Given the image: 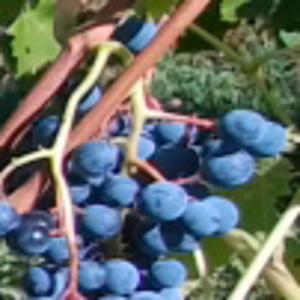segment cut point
<instances>
[{"label":"cut point","mask_w":300,"mask_h":300,"mask_svg":"<svg viewBox=\"0 0 300 300\" xmlns=\"http://www.w3.org/2000/svg\"><path fill=\"white\" fill-rule=\"evenodd\" d=\"M143 86L144 81L142 79H137L128 90V96L131 98V111L133 112V126L130 137V142L132 144L131 159L137 157L143 124L147 122L149 116Z\"/></svg>","instance_id":"7d7e1d6f"},{"label":"cut point","mask_w":300,"mask_h":300,"mask_svg":"<svg viewBox=\"0 0 300 300\" xmlns=\"http://www.w3.org/2000/svg\"><path fill=\"white\" fill-rule=\"evenodd\" d=\"M112 54L120 57L125 68H130L135 61V56L123 43L113 40L111 37H105L91 50V55L95 59L92 61L89 73L69 97L64 110V121L59 128V137L54 149H35L30 152L32 159L52 158V170L57 179V196L59 198L70 193V183L66 181V174L61 166V155L67 146L68 133L75 124V111L85 92L99 78Z\"/></svg>","instance_id":"6a23745f"}]
</instances>
